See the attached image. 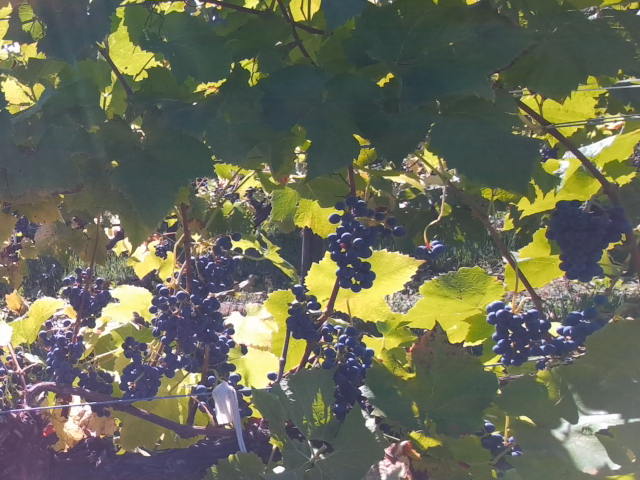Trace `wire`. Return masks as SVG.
<instances>
[{
    "instance_id": "1",
    "label": "wire",
    "mask_w": 640,
    "mask_h": 480,
    "mask_svg": "<svg viewBox=\"0 0 640 480\" xmlns=\"http://www.w3.org/2000/svg\"><path fill=\"white\" fill-rule=\"evenodd\" d=\"M213 391L199 392L194 394L181 393V394H165V395H152L145 398H119V399H111V400H91L85 401L83 403H67V404H56V405H44V406H23L16 407L11 409H3L0 410V414L3 412H25V411H47V410H58V409H70V408H85L87 406L93 405H113V404H121V403H147L155 400H167V399H196L201 397H209L213 396Z\"/></svg>"
},
{
    "instance_id": "2",
    "label": "wire",
    "mask_w": 640,
    "mask_h": 480,
    "mask_svg": "<svg viewBox=\"0 0 640 480\" xmlns=\"http://www.w3.org/2000/svg\"><path fill=\"white\" fill-rule=\"evenodd\" d=\"M578 353H561V354H546V355H533L528 358L529 362L536 360H549V359H563V358H578Z\"/></svg>"
}]
</instances>
